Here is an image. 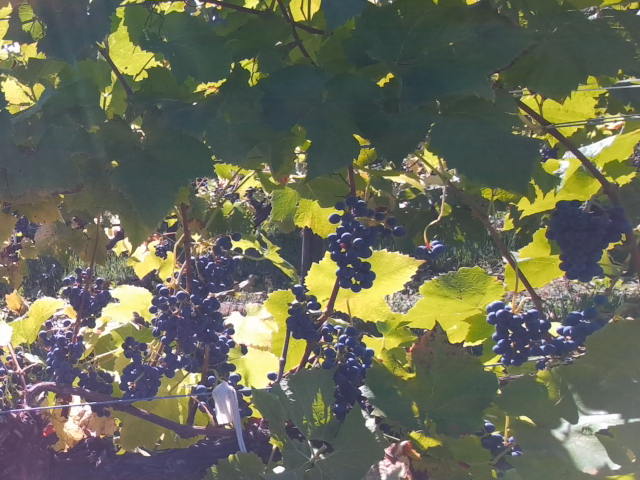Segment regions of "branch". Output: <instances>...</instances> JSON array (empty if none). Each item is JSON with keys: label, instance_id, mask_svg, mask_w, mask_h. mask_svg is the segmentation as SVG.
Wrapping results in <instances>:
<instances>
[{"label": "branch", "instance_id": "branch-1", "mask_svg": "<svg viewBox=\"0 0 640 480\" xmlns=\"http://www.w3.org/2000/svg\"><path fill=\"white\" fill-rule=\"evenodd\" d=\"M414 154L420 158L421 162L425 165V167L429 171L434 173L436 175V177L438 179H440L445 186H447L448 188L453 190L456 194H458L472 208L473 212L478 216L479 220L481 221V223L484 225L485 229L490 234V236L492 238V241L496 245L498 251L502 255V257L505 260V262L510 267H513L515 265V261L511 258V256L509 255L508 251L506 250L505 246L501 242V239L499 238V236H498L497 232L495 231L494 227L489 222V220L487 219L485 214L482 212V210L479 208V206L474 202V200L472 198H470L467 195V193L463 189H461L456 183H454L453 181H450L445 175L441 174L436 168H434L428 162V160L426 159V157L424 156V154L422 152H420L419 150H415Z\"/></svg>", "mask_w": 640, "mask_h": 480}, {"label": "branch", "instance_id": "branch-2", "mask_svg": "<svg viewBox=\"0 0 640 480\" xmlns=\"http://www.w3.org/2000/svg\"><path fill=\"white\" fill-rule=\"evenodd\" d=\"M550 135L557 141H559L569 152H571L577 159H579L586 167L591 171V173L597 176L600 179L601 184L604 186L606 192L608 193L609 199L612 201L614 205L620 207L622 202L615 195V191L613 190L611 184L608 182L607 176L597 169V167L593 164L591 160H589L585 155H583L575 146H573L568 139L559 134L555 128H551L549 130Z\"/></svg>", "mask_w": 640, "mask_h": 480}, {"label": "branch", "instance_id": "branch-3", "mask_svg": "<svg viewBox=\"0 0 640 480\" xmlns=\"http://www.w3.org/2000/svg\"><path fill=\"white\" fill-rule=\"evenodd\" d=\"M179 208H180V216L182 220V243H183L184 266H185L184 292L186 294H189L191 292V278H192L191 251H190V241H189V218L187 214V205L185 203H181L179 205Z\"/></svg>", "mask_w": 640, "mask_h": 480}, {"label": "branch", "instance_id": "branch-4", "mask_svg": "<svg viewBox=\"0 0 640 480\" xmlns=\"http://www.w3.org/2000/svg\"><path fill=\"white\" fill-rule=\"evenodd\" d=\"M276 3H277L279 13L287 25H293L294 27L306 30L314 35L324 36L326 34V30L324 28H316L310 25L309 23H305L297 19L293 20L292 18H290V16L286 11L284 0H276Z\"/></svg>", "mask_w": 640, "mask_h": 480}, {"label": "branch", "instance_id": "branch-5", "mask_svg": "<svg viewBox=\"0 0 640 480\" xmlns=\"http://www.w3.org/2000/svg\"><path fill=\"white\" fill-rule=\"evenodd\" d=\"M517 275H518L519 281L526 288L527 292L530 294L533 301L535 302L537 307L538 317L540 319H544L546 317V314H545V309H544V304L542 299L539 297L538 293L534 290L533 286L526 279L525 273L522 269H519L517 271Z\"/></svg>", "mask_w": 640, "mask_h": 480}, {"label": "branch", "instance_id": "branch-6", "mask_svg": "<svg viewBox=\"0 0 640 480\" xmlns=\"http://www.w3.org/2000/svg\"><path fill=\"white\" fill-rule=\"evenodd\" d=\"M291 335H292V332L290 330H287L283 334L281 339V355H280V361H279V366L277 371V378L279 380H282L284 378L287 357H288V342Z\"/></svg>", "mask_w": 640, "mask_h": 480}, {"label": "branch", "instance_id": "branch-7", "mask_svg": "<svg viewBox=\"0 0 640 480\" xmlns=\"http://www.w3.org/2000/svg\"><path fill=\"white\" fill-rule=\"evenodd\" d=\"M339 287H340V283L338 281H335L333 283L332 287H331V290H330L329 295L327 297V300L325 302L324 312H322L318 316V318L316 320V324L318 326H321L323 324L324 320L331 315L332 305H333V302H334L335 297L337 295V292L339 290Z\"/></svg>", "mask_w": 640, "mask_h": 480}, {"label": "branch", "instance_id": "branch-8", "mask_svg": "<svg viewBox=\"0 0 640 480\" xmlns=\"http://www.w3.org/2000/svg\"><path fill=\"white\" fill-rule=\"evenodd\" d=\"M217 5L219 7L231 9V10L236 11V12L249 13V14H252V15H258L260 13V10L258 8H255V7H252V6L238 5L236 3H233V2H230V1H225V0H219L217 2Z\"/></svg>", "mask_w": 640, "mask_h": 480}, {"label": "branch", "instance_id": "branch-9", "mask_svg": "<svg viewBox=\"0 0 640 480\" xmlns=\"http://www.w3.org/2000/svg\"><path fill=\"white\" fill-rule=\"evenodd\" d=\"M516 105L519 108L523 109L530 116H532L538 124L544 127H548L550 125V122L547 119L543 118L538 112H536L531 106L527 105L524 101L518 100L516 102Z\"/></svg>", "mask_w": 640, "mask_h": 480}, {"label": "branch", "instance_id": "branch-10", "mask_svg": "<svg viewBox=\"0 0 640 480\" xmlns=\"http://www.w3.org/2000/svg\"><path fill=\"white\" fill-rule=\"evenodd\" d=\"M99 223L100 218L96 217L94 221V240H93V248L89 258V268H94V260L98 250V242H99Z\"/></svg>", "mask_w": 640, "mask_h": 480}, {"label": "branch", "instance_id": "branch-11", "mask_svg": "<svg viewBox=\"0 0 640 480\" xmlns=\"http://www.w3.org/2000/svg\"><path fill=\"white\" fill-rule=\"evenodd\" d=\"M627 239L629 240L630 248L635 258L633 265L636 267V272L640 274V251L638 249L636 238L633 234H629Z\"/></svg>", "mask_w": 640, "mask_h": 480}, {"label": "branch", "instance_id": "branch-12", "mask_svg": "<svg viewBox=\"0 0 640 480\" xmlns=\"http://www.w3.org/2000/svg\"><path fill=\"white\" fill-rule=\"evenodd\" d=\"M84 307H85V300L81 299L79 304V309L75 315L74 322H73V333H72V339H71L72 343H75L77 341L78 324L80 321V317L82 316V313L84 311Z\"/></svg>", "mask_w": 640, "mask_h": 480}, {"label": "branch", "instance_id": "branch-13", "mask_svg": "<svg viewBox=\"0 0 640 480\" xmlns=\"http://www.w3.org/2000/svg\"><path fill=\"white\" fill-rule=\"evenodd\" d=\"M314 349V343L312 341H309L307 343L306 349L304 350V352L302 353L300 360L298 361V364L296 366V369L298 371H302L305 367V364L310 356V354L312 353Z\"/></svg>", "mask_w": 640, "mask_h": 480}, {"label": "branch", "instance_id": "branch-14", "mask_svg": "<svg viewBox=\"0 0 640 480\" xmlns=\"http://www.w3.org/2000/svg\"><path fill=\"white\" fill-rule=\"evenodd\" d=\"M291 36H292L293 40L295 41L300 54L303 57H307L309 55V52L307 51L306 47L304 46V43H303V41H302V39H301V37H300V35H299V33H298V31L296 29H293L291 31Z\"/></svg>", "mask_w": 640, "mask_h": 480}, {"label": "branch", "instance_id": "branch-15", "mask_svg": "<svg viewBox=\"0 0 640 480\" xmlns=\"http://www.w3.org/2000/svg\"><path fill=\"white\" fill-rule=\"evenodd\" d=\"M187 411H188V414H187L186 425L188 427H192L194 425V416L197 413L196 401L194 399H190L188 401Z\"/></svg>", "mask_w": 640, "mask_h": 480}, {"label": "branch", "instance_id": "branch-16", "mask_svg": "<svg viewBox=\"0 0 640 480\" xmlns=\"http://www.w3.org/2000/svg\"><path fill=\"white\" fill-rule=\"evenodd\" d=\"M91 281H92V275H91V274H88V275H87V278H86V281H85V283H84V286H83V290H84V291H87V290H88V288H89V286H90Z\"/></svg>", "mask_w": 640, "mask_h": 480}]
</instances>
